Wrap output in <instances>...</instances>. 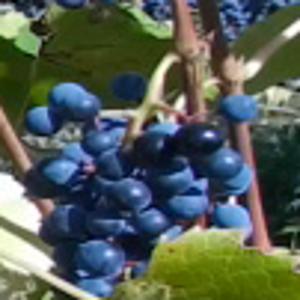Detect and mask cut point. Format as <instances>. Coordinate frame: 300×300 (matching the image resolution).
Instances as JSON below:
<instances>
[{"mask_svg": "<svg viewBox=\"0 0 300 300\" xmlns=\"http://www.w3.org/2000/svg\"><path fill=\"white\" fill-rule=\"evenodd\" d=\"M179 62L180 58L177 49H170L160 59L146 88L144 101L130 121V130L140 131L152 117L164 96L166 75L170 67Z\"/></svg>", "mask_w": 300, "mask_h": 300, "instance_id": "obj_1", "label": "cut point"}]
</instances>
